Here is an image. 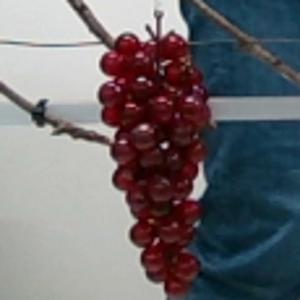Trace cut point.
<instances>
[{
    "label": "cut point",
    "mask_w": 300,
    "mask_h": 300,
    "mask_svg": "<svg viewBox=\"0 0 300 300\" xmlns=\"http://www.w3.org/2000/svg\"><path fill=\"white\" fill-rule=\"evenodd\" d=\"M152 16L156 21L155 40L161 42L163 38V18L165 16L164 0H154Z\"/></svg>",
    "instance_id": "obj_1"
}]
</instances>
